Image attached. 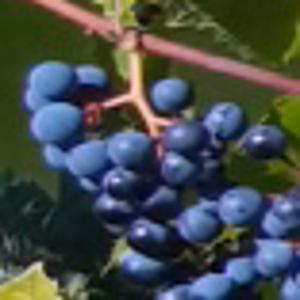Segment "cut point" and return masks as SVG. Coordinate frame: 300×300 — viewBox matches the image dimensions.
Here are the masks:
<instances>
[{
  "mask_svg": "<svg viewBox=\"0 0 300 300\" xmlns=\"http://www.w3.org/2000/svg\"><path fill=\"white\" fill-rule=\"evenodd\" d=\"M128 90L129 92L120 94L113 98H108L103 102V108L110 110L128 102L138 104V111L147 126L150 135H157L159 128H166L168 121L160 117L152 116L146 100V93L143 85L144 64L143 53L140 49L129 51L128 53Z\"/></svg>",
  "mask_w": 300,
  "mask_h": 300,
  "instance_id": "cut-point-1",
  "label": "cut point"
}]
</instances>
